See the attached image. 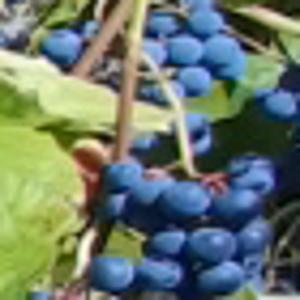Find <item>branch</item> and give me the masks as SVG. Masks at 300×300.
Wrapping results in <instances>:
<instances>
[{
  "label": "branch",
  "mask_w": 300,
  "mask_h": 300,
  "mask_svg": "<svg viewBox=\"0 0 300 300\" xmlns=\"http://www.w3.org/2000/svg\"><path fill=\"white\" fill-rule=\"evenodd\" d=\"M148 10V0H119L106 15L100 29L81 57L74 65V73L79 78L88 75L100 55L107 49L113 35L126 25L121 53L122 95L118 106L112 139V156L115 161L125 160L132 138L135 118L136 49L141 42L142 24Z\"/></svg>",
  "instance_id": "1"
}]
</instances>
